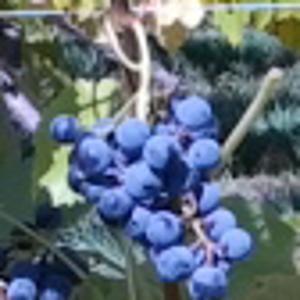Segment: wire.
I'll use <instances>...</instances> for the list:
<instances>
[{
  "label": "wire",
  "mask_w": 300,
  "mask_h": 300,
  "mask_svg": "<svg viewBox=\"0 0 300 300\" xmlns=\"http://www.w3.org/2000/svg\"><path fill=\"white\" fill-rule=\"evenodd\" d=\"M286 10H300V1L281 2H253V3H210L197 5L175 6H142L130 5L128 12L138 15H179L201 14L214 12L248 13L257 11L280 12Z\"/></svg>",
  "instance_id": "obj_1"
},
{
  "label": "wire",
  "mask_w": 300,
  "mask_h": 300,
  "mask_svg": "<svg viewBox=\"0 0 300 300\" xmlns=\"http://www.w3.org/2000/svg\"><path fill=\"white\" fill-rule=\"evenodd\" d=\"M73 15L71 8L61 10H41L34 8L0 9V18L29 17L36 19H66Z\"/></svg>",
  "instance_id": "obj_2"
}]
</instances>
